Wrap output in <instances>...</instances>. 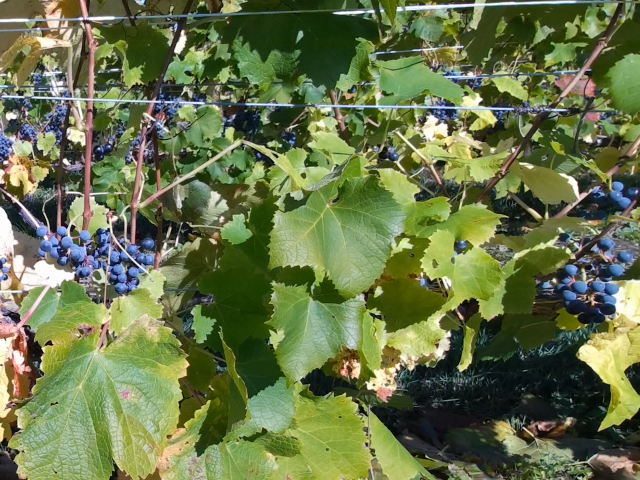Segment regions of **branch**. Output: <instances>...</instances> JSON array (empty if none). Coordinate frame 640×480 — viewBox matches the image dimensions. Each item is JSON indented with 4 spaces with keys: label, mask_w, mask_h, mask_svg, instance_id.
Wrapping results in <instances>:
<instances>
[{
    "label": "branch",
    "mask_w": 640,
    "mask_h": 480,
    "mask_svg": "<svg viewBox=\"0 0 640 480\" xmlns=\"http://www.w3.org/2000/svg\"><path fill=\"white\" fill-rule=\"evenodd\" d=\"M155 105H148L141 118V130L138 141L137 157L134 166V179L132 180L133 195L130 203V241H137V206L140 197L139 182L141 181V168L144 159L145 143L148 132V121L154 112Z\"/></svg>",
    "instance_id": "1"
},
{
    "label": "branch",
    "mask_w": 640,
    "mask_h": 480,
    "mask_svg": "<svg viewBox=\"0 0 640 480\" xmlns=\"http://www.w3.org/2000/svg\"><path fill=\"white\" fill-rule=\"evenodd\" d=\"M95 112V103H88V110L85 118V140H84V214L81 220V228L87 230L89 228V219L91 217V197L90 189L92 184L91 175V143H92V120Z\"/></svg>",
    "instance_id": "2"
},
{
    "label": "branch",
    "mask_w": 640,
    "mask_h": 480,
    "mask_svg": "<svg viewBox=\"0 0 640 480\" xmlns=\"http://www.w3.org/2000/svg\"><path fill=\"white\" fill-rule=\"evenodd\" d=\"M624 8V4L619 2L616 5L615 11L612 14L609 24L607 26L606 31L603 33L601 38L599 39L598 46L590 53V55L583 61V63L579 66L576 73L573 77L565 84V86L561 89V91L554 97L552 102L550 103L551 107H557L561 101V99L572 89V87L577 83L589 65L595 60V58L603 51L606 46V42L608 38L613 34L616 23L622 13Z\"/></svg>",
    "instance_id": "3"
},
{
    "label": "branch",
    "mask_w": 640,
    "mask_h": 480,
    "mask_svg": "<svg viewBox=\"0 0 640 480\" xmlns=\"http://www.w3.org/2000/svg\"><path fill=\"white\" fill-rule=\"evenodd\" d=\"M548 117L547 113H541L540 115H538L534 121V123L528 128V130L523 134V136L521 137L518 145L510 152L507 160L505 161V163L503 164V166L500 168V170H498L490 179V181L488 182L487 185H485L482 190L479 192V195L476 199V202L478 204H482L484 202V199L486 197V194L488 192H490L493 187L495 186V184L497 183V181L508 171V169L512 166V163L514 162L516 156L520 153V151L525 147L528 139L531 137V135L535 132V130H537L540 126L541 123Z\"/></svg>",
    "instance_id": "4"
},
{
    "label": "branch",
    "mask_w": 640,
    "mask_h": 480,
    "mask_svg": "<svg viewBox=\"0 0 640 480\" xmlns=\"http://www.w3.org/2000/svg\"><path fill=\"white\" fill-rule=\"evenodd\" d=\"M187 19H179L176 22L175 28H174V32L172 33L171 36V42L169 45V48L166 52V63L164 64L163 68L161 69V72L159 74V77L157 78L156 82H155V86L151 95V98L157 99L159 97L160 91L162 89V85L164 80L166 79V76L169 72V70L171 69L172 65H173V60H174V56H175V51H176V47L178 44V39L179 36L181 34L183 25L186 23Z\"/></svg>",
    "instance_id": "5"
},
{
    "label": "branch",
    "mask_w": 640,
    "mask_h": 480,
    "mask_svg": "<svg viewBox=\"0 0 640 480\" xmlns=\"http://www.w3.org/2000/svg\"><path fill=\"white\" fill-rule=\"evenodd\" d=\"M84 27L86 29V37L90 46L88 53L87 96L92 98L94 96L95 56L97 43L93 35L92 24L90 22H85Z\"/></svg>",
    "instance_id": "6"
}]
</instances>
